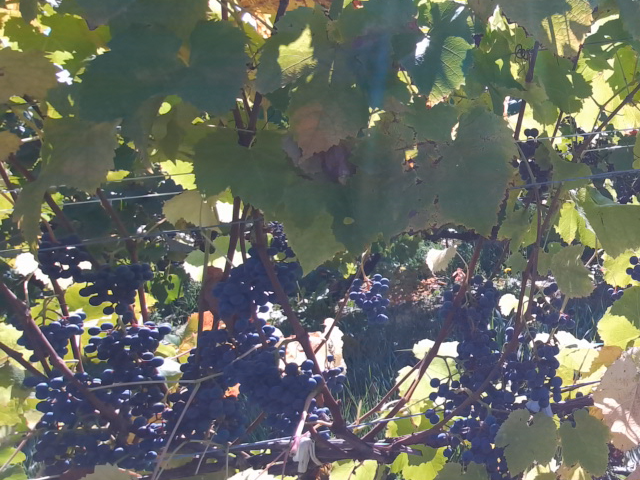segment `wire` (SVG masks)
<instances>
[{"mask_svg": "<svg viewBox=\"0 0 640 480\" xmlns=\"http://www.w3.org/2000/svg\"><path fill=\"white\" fill-rule=\"evenodd\" d=\"M250 223H251V219L250 218H247V219H234V220L227 221L226 223H223V224L212 225V226H203V227H197V228H183V229H160V230H156L154 232H139V233H137L135 235L114 236V237H109V238H98V239L93 240V241L80 242V243H76V244H57V245H53V246H44V247H38L37 251L38 252H46V251H55V250H59V249H78V248H83V247L99 245L101 243H111V242H117V241L137 240V239L142 238V237H157L158 235H162V234H185V233H199V232H205V231H215V230L225 229V228H228V227H230L232 225H236V224H250Z\"/></svg>", "mask_w": 640, "mask_h": 480, "instance_id": "obj_1", "label": "wire"}, {"mask_svg": "<svg viewBox=\"0 0 640 480\" xmlns=\"http://www.w3.org/2000/svg\"><path fill=\"white\" fill-rule=\"evenodd\" d=\"M637 171H640V166L624 167V168H619V169H615V170H609V171H605V172H598V173H594V174H590V175H581L580 177H560V178H557V179L547 180V181H543V182H532V183H527V184H518V185L510 186L509 190L510 191H515V190H520V189H529V188H535V187H545V186H549V185L559 184V183H562V182H583L585 180H592V179H596V178H600V177H607V176H611V175H617V174L626 173V172H637Z\"/></svg>", "mask_w": 640, "mask_h": 480, "instance_id": "obj_2", "label": "wire"}, {"mask_svg": "<svg viewBox=\"0 0 640 480\" xmlns=\"http://www.w3.org/2000/svg\"><path fill=\"white\" fill-rule=\"evenodd\" d=\"M638 130L637 126L633 127H621L618 129H610V130H592V131H583L579 133H568V134H553V135H544V136H534V137H526L523 139H515V144H525L528 142H536V141H546V140H555V139H571V138H582L585 136H594V135H613L620 134L624 132H635Z\"/></svg>", "mask_w": 640, "mask_h": 480, "instance_id": "obj_3", "label": "wire"}, {"mask_svg": "<svg viewBox=\"0 0 640 480\" xmlns=\"http://www.w3.org/2000/svg\"><path fill=\"white\" fill-rule=\"evenodd\" d=\"M193 176V172L189 171V172H170V173H165V174H160V175H150V176H121L118 178H109L107 180L108 184L111 183H120L123 181H152V180H162V179H168V178H173V177H192Z\"/></svg>", "mask_w": 640, "mask_h": 480, "instance_id": "obj_4", "label": "wire"}, {"mask_svg": "<svg viewBox=\"0 0 640 480\" xmlns=\"http://www.w3.org/2000/svg\"><path fill=\"white\" fill-rule=\"evenodd\" d=\"M424 415H425V412L421 411V412H418L416 414L397 415V416H392V417H383V418H380V419H377V420H373V421H369V422H363V423H357V424H346L345 428L346 429H359V428H365V427H371V426L383 424L385 422H394V421H399V420L418 419V418H421Z\"/></svg>", "mask_w": 640, "mask_h": 480, "instance_id": "obj_5", "label": "wire"}, {"mask_svg": "<svg viewBox=\"0 0 640 480\" xmlns=\"http://www.w3.org/2000/svg\"><path fill=\"white\" fill-rule=\"evenodd\" d=\"M179 194H180L179 190H172V191H169V192L154 193V194H148V195H135V196L111 195V196L107 197V200L108 201H113V200H118V201L150 200V199H156V198L171 197V196H175V195H179Z\"/></svg>", "mask_w": 640, "mask_h": 480, "instance_id": "obj_6", "label": "wire"}, {"mask_svg": "<svg viewBox=\"0 0 640 480\" xmlns=\"http://www.w3.org/2000/svg\"><path fill=\"white\" fill-rule=\"evenodd\" d=\"M292 438L285 436V437H274V438H270V439H258V440H254V441H249L246 442L244 444L241 445H229L228 449L229 450H243V449H247L251 446H256V445H260V444H272V443H277V442H291Z\"/></svg>", "mask_w": 640, "mask_h": 480, "instance_id": "obj_7", "label": "wire"}, {"mask_svg": "<svg viewBox=\"0 0 640 480\" xmlns=\"http://www.w3.org/2000/svg\"><path fill=\"white\" fill-rule=\"evenodd\" d=\"M203 453H204L203 449H198V450H194V451H185V452H180V453L174 454L172 456V459L176 460V459H179V458H182V457H187V456H197V455H201Z\"/></svg>", "mask_w": 640, "mask_h": 480, "instance_id": "obj_8", "label": "wire"}]
</instances>
